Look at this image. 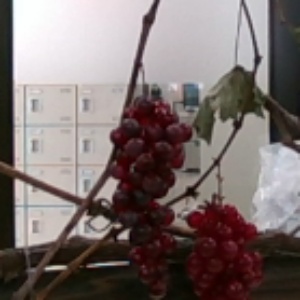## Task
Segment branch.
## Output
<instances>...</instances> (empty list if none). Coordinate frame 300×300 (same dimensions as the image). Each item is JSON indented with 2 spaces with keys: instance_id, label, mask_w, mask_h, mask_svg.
<instances>
[{
  "instance_id": "branch-1",
  "label": "branch",
  "mask_w": 300,
  "mask_h": 300,
  "mask_svg": "<svg viewBox=\"0 0 300 300\" xmlns=\"http://www.w3.org/2000/svg\"><path fill=\"white\" fill-rule=\"evenodd\" d=\"M115 161V155L112 152L110 157L107 161L105 170L101 173L99 180L97 181L96 185L93 189L89 192L86 198L77 197L67 192L60 190L57 187H54L46 182H43L39 179H34L29 175L14 170L4 161H0V171L7 175L10 178H19L20 180L24 181L31 186L40 189L44 192H47L53 196H58L61 199L67 200L71 203H75L79 205L80 208L74 213L73 217L69 220L67 225L62 229L61 233L59 234L57 240L54 242L48 253L45 257L40 261L37 268L31 273L25 283L18 289L16 293L12 295L11 300H23L30 289L33 287L35 282L40 278L46 265L52 260L58 249L61 247L63 242L65 241L67 235L73 230L75 225L78 223L81 216L87 210L93 215L99 217H105L110 219L111 221L119 224L120 226L113 228L112 230L105 233L102 237H100L92 246L88 247L85 251H83L79 256H77L68 266H66L51 282L48 286L42 289L38 295L35 297V300H45L52 292L58 289L63 282L69 277V275L73 272V270L86 258H88L92 253L96 252L104 243H106L109 239L115 237L116 235L123 233L127 229H131V227L123 226L119 219L115 218L112 213L111 209L105 205H102L96 201H93L98 193L104 188L107 180L111 177L110 173V166Z\"/></svg>"
},
{
  "instance_id": "branch-2",
  "label": "branch",
  "mask_w": 300,
  "mask_h": 300,
  "mask_svg": "<svg viewBox=\"0 0 300 300\" xmlns=\"http://www.w3.org/2000/svg\"><path fill=\"white\" fill-rule=\"evenodd\" d=\"M161 3V0H153L149 10L142 15V32L140 40L137 45L135 59L133 61V71L131 73L130 82L128 89L126 91L125 102L123 111L121 112V120L124 118L125 108L132 104V99L137 85V80L139 76V64L142 61L144 48L148 39L150 30L153 28V23L155 22V14L158 10V6Z\"/></svg>"
},
{
  "instance_id": "branch-3",
  "label": "branch",
  "mask_w": 300,
  "mask_h": 300,
  "mask_svg": "<svg viewBox=\"0 0 300 300\" xmlns=\"http://www.w3.org/2000/svg\"><path fill=\"white\" fill-rule=\"evenodd\" d=\"M244 115L245 112L241 113V116L239 118V120H234L233 126L234 129L230 135V137L228 138V140L225 142L224 146L222 147V149L219 151L218 156L215 157L213 159V163L207 168V170L201 175V177L193 184V186H186L185 187V192L180 194L179 196H177L176 198L170 200L168 203H165L164 206H173L177 203H179L180 201H182L183 199L187 198V197H192L195 195V190L197 188H199L206 180V178L210 175V173L216 168V164L217 162L223 158L224 154L227 153V150L229 149L230 145L233 143V141L235 140V137L237 136L240 128L242 127L243 121H244Z\"/></svg>"
},
{
  "instance_id": "branch-4",
  "label": "branch",
  "mask_w": 300,
  "mask_h": 300,
  "mask_svg": "<svg viewBox=\"0 0 300 300\" xmlns=\"http://www.w3.org/2000/svg\"><path fill=\"white\" fill-rule=\"evenodd\" d=\"M247 248H274L275 250L300 251V238L277 233L271 237H255L248 241Z\"/></svg>"
},
{
  "instance_id": "branch-5",
  "label": "branch",
  "mask_w": 300,
  "mask_h": 300,
  "mask_svg": "<svg viewBox=\"0 0 300 300\" xmlns=\"http://www.w3.org/2000/svg\"><path fill=\"white\" fill-rule=\"evenodd\" d=\"M265 108L293 128L300 129V118L289 113L285 107L276 100L268 99L265 103Z\"/></svg>"
},
{
  "instance_id": "branch-6",
  "label": "branch",
  "mask_w": 300,
  "mask_h": 300,
  "mask_svg": "<svg viewBox=\"0 0 300 300\" xmlns=\"http://www.w3.org/2000/svg\"><path fill=\"white\" fill-rule=\"evenodd\" d=\"M241 5L244 8L246 20H247V23H248V27H250V32H251V36H252V40H253V46H254V69H253V75H255V73L257 72V68L262 63V56L259 55V52H258V46H257V43H256V34H255V31H254L253 24L251 22V15H250L249 8L247 7V5H246V3L244 1H241Z\"/></svg>"
},
{
  "instance_id": "branch-7",
  "label": "branch",
  "mask_w": 300,
  "mask_h": 300,
  "mask_svg": "<svg viewBox=\"0 0 300 300\" xmlns=\"http://www.w3.org/2000/svg\"><path fill=\"white\" fill-rule=\"evenodd\" d=\"M160 227L162 229V233H170L176 237L192 238L193 240H196L199 237L196 230L192 228L172 226L171 224H160Z\"/></svg>"
}]
</instances>
